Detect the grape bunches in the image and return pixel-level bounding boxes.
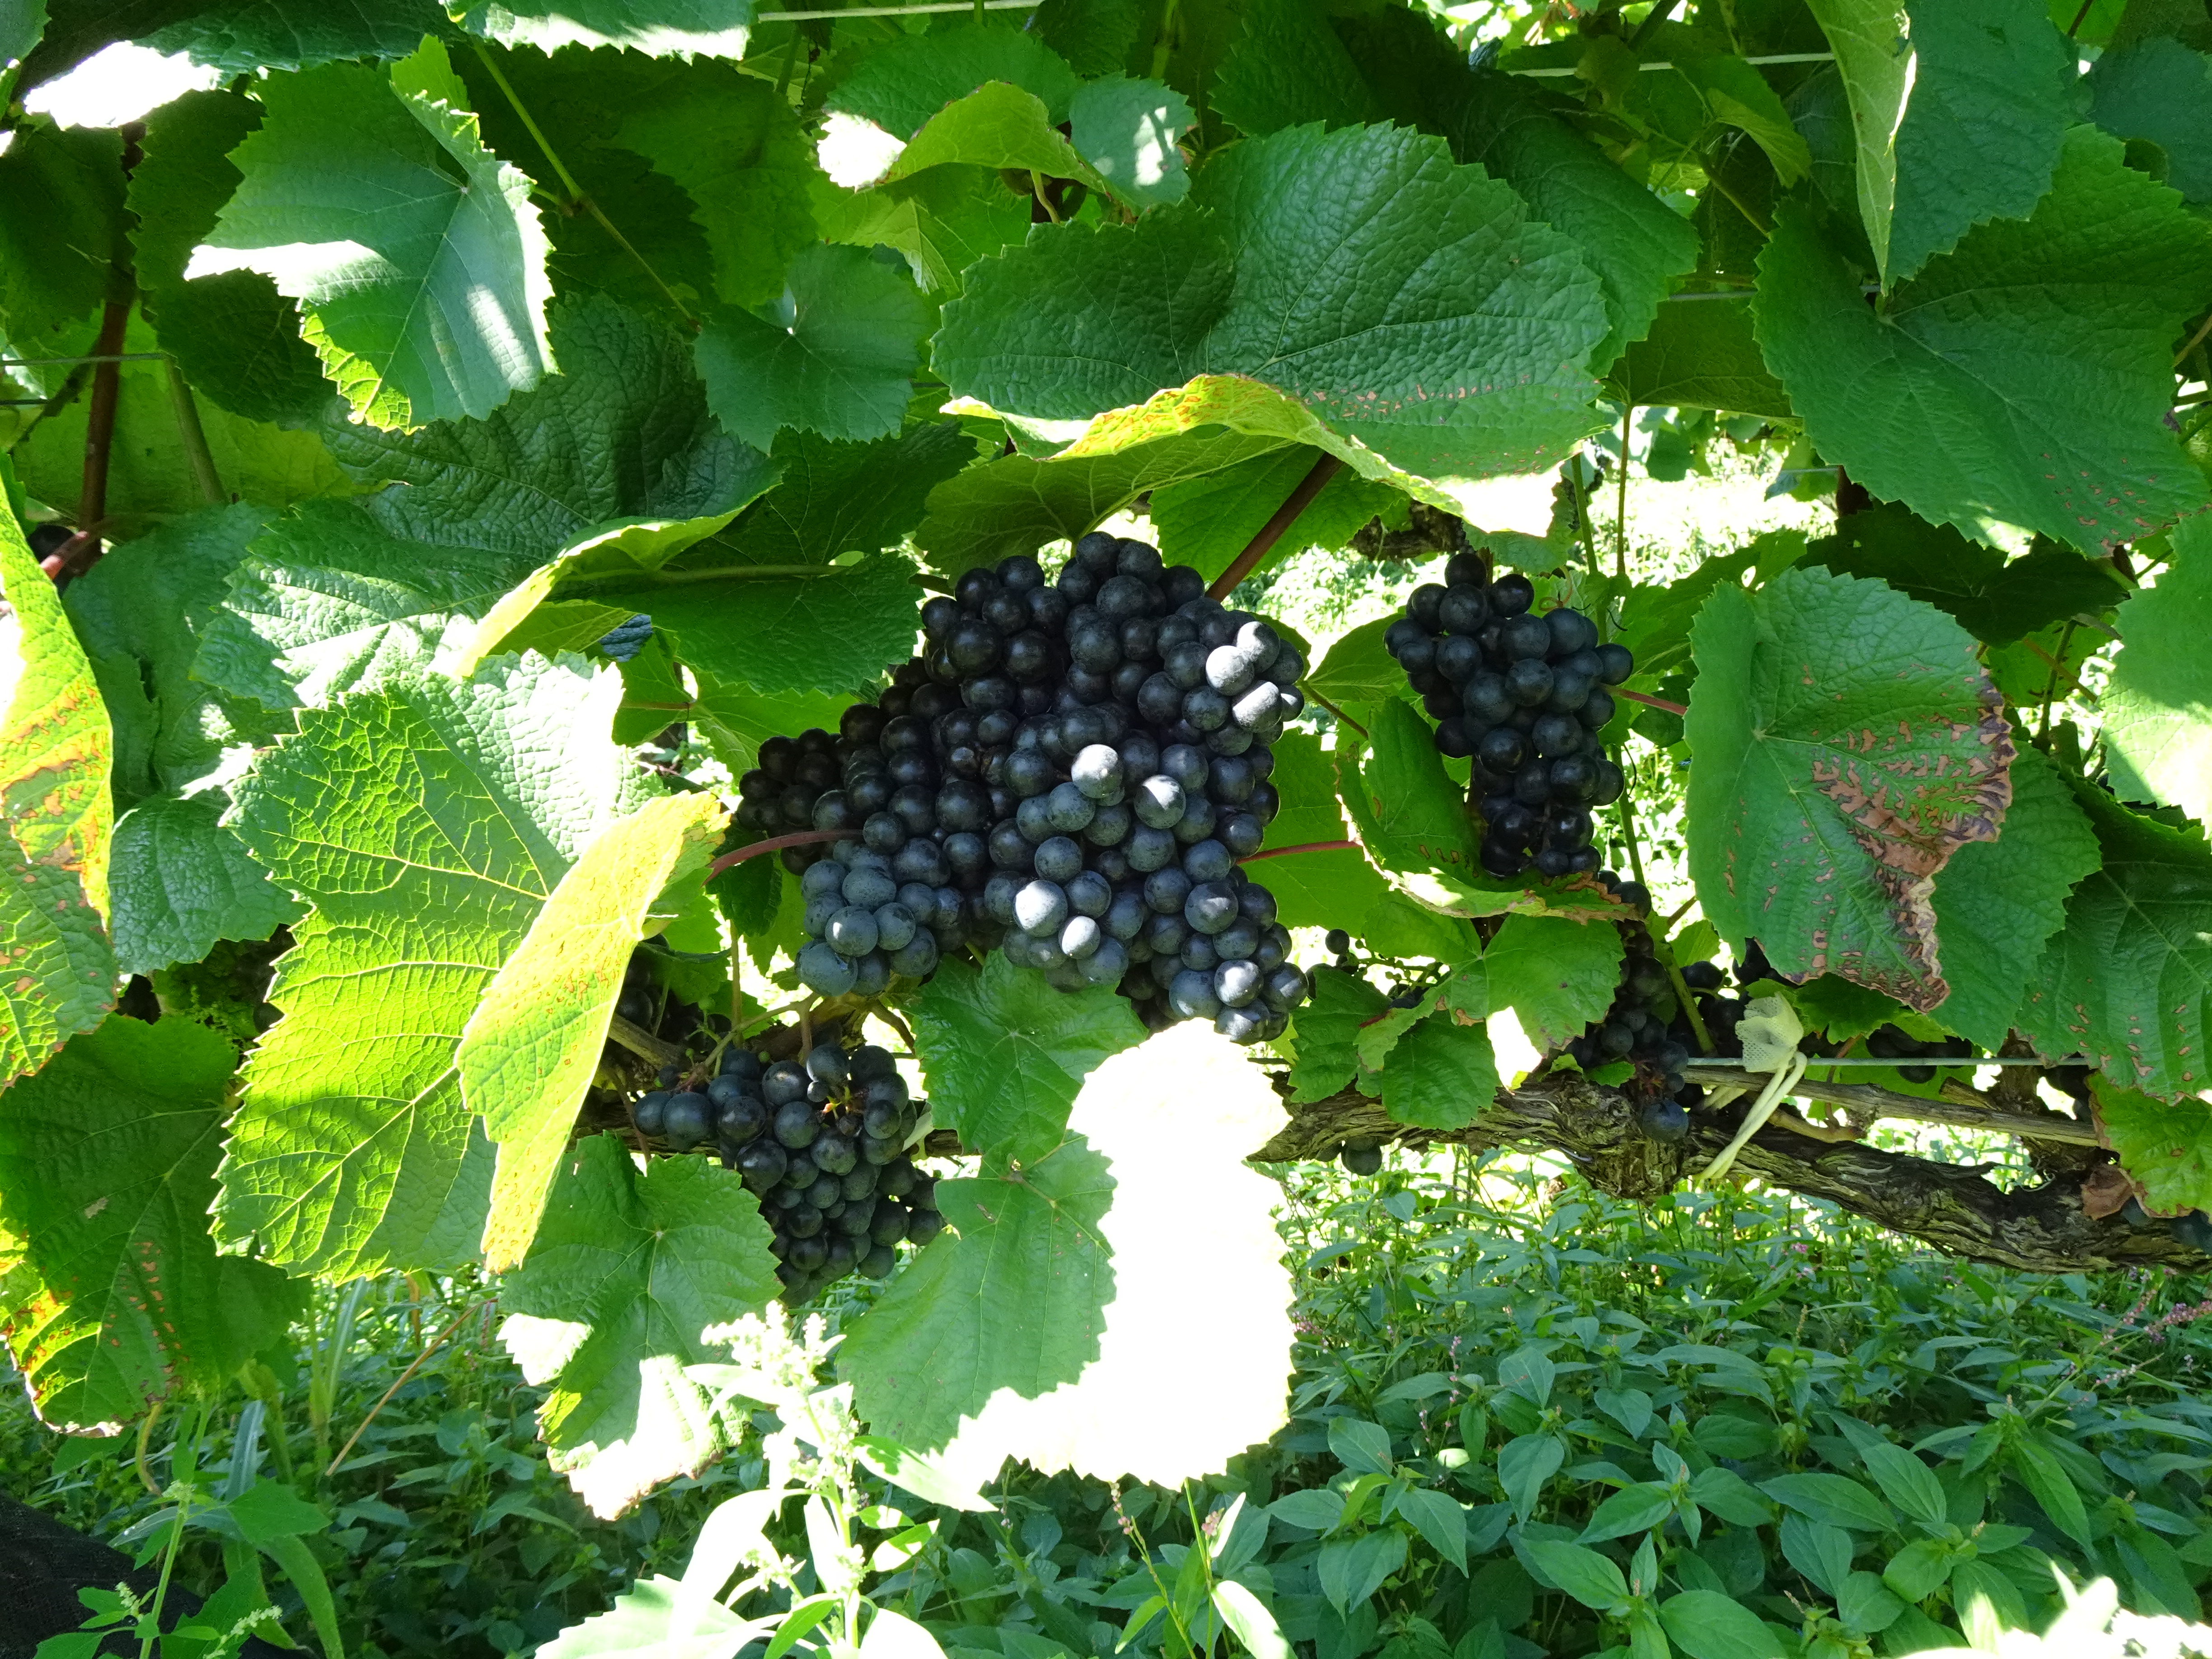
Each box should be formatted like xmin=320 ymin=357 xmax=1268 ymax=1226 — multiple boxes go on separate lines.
xmin=1305 ymin=929 xmax=1430 ymax=1009
xmin=574 ymin=934 xmax=735 ymax=1126
xmin=230 ymin=919 xmax=297 ymax=1033
xmin=1316 ymin=1136 xmax=1382 ymax=1175
xmin=1795 ymin=1018 xmax=1843 ymax=1058
xmin=736 ymin=728 xmax=852 ymax=877
xmin=798 ymin=688 xmax=995 ymax=995
xmin=1666 ymin=962 xmax=1752 ymax=1121
xmin=922 ymin=555 xmax=1070 ymax=816
xmin=1125 ymin=843 xmax=1309 ymax=1046
xmin=1733 ymin=935 xmax=1805 ymax=1007
xmin=1054 ymin=531 xmax=1303 ymax=859
xmin=1867 ymin=1023 xmax=1972 ymax=1084
xmin=1574 ymin=870 xmax=1690 ymax=1143
xmin=1383 ymin=553 xmax=1634 ymax=875
xmin=716 ymin=1043 xmax=917 ymax=1306
xmin=857 ymin=1155 xmax=945 ymax=1281
xmin=632 ymin=1049 xmax=767 ymax=1145
xmin=985 ymin=744 xmax=1186 ymax=989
